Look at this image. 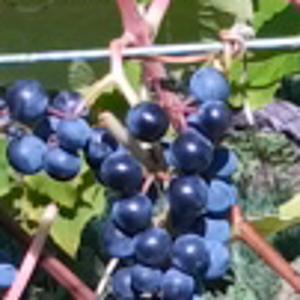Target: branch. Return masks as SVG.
<instances>
[{"mask_svg": "<svg viewBox=\"0 0 300 300\" xmlns=\"http://www.w3.org/2000/svg\"><path fill=\"white\" fill-rule=\"evenodd\" d=\"M139 67L145 72L146 78L152 81V87L172 130L176 133L183 132L187 123L186 110L173 85L171 75L167 73V61L157 57L141 59Z\"/></svg>", "mask_w": 300, "mask_h": 300, "instance_id": "branch-2", "label": "branch"}, {"mask_svg": "<svg viewBox=\"0 0 300 300\" xmlns=\"http://www.w3.org/2000/svg\"><path fill=\"white\" fill-rule=\"evenodd\" d=\"M228 220L232 230L242 242L268 264L273 266L294 291L300 292V273L284 255L253 231L251 226L245 221L243 211L240 207L233 206L229 209Z\"/></svg>", "mask_w": 300, "mask_h": 300, "instance_id": "branch-3", "label": "branch"}, {"mask_svg": "<svg viewBox=\"0 0 300 300\" xmlns=\"http://www.w3.org/2000/svg\"><path fill=\"white\" fill-rule=\"evenodd\" d=\"M118 14L134 46L144 48L154 45L153 27L137 0H119Z\"/></svg>", "mask_w": 300, "mask_h": 300, "instance_id": "branch-4", "label": "branch"}, {"mask_svg": "<svg viewBox=\"0 0 300 300\" xmlns=\"http://www.w3.org/2000/svg\"><path fill=\"white\" fill-rule=\"evenodd\" d=\"M58 211L57 202H48L35 232L32 233L28 232L25 226L13 218L7 210L0 208V227L12 235L16 244L25 253L15 275V281L5 293L6 300L20 299L28 286L29 277L36 264L69 288L77 298L96 300V290L87 286L79 276L55 259L53 251L45 244Z\"/></svg>", "mask_w": 300, "mask_h": 300, "instance_id": "branch-1", "label": "branch"}]
</instances>
